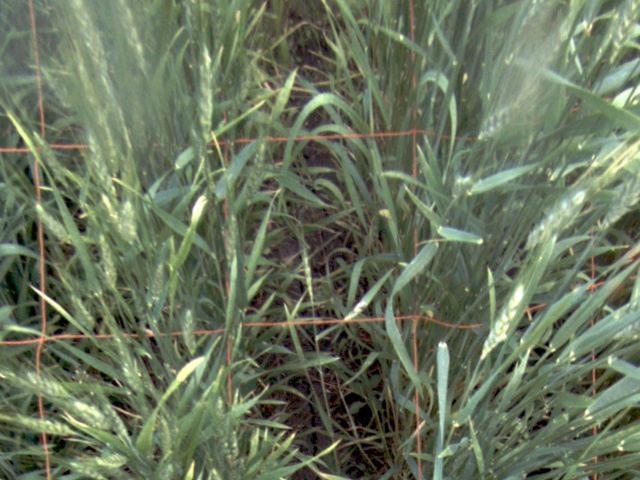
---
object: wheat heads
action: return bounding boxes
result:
[34,133,65,186]
[117,347,144,394]
[101,455,127,465]
[69,462,109,480]
[116,0,147,63]
[478,90,535,136]
[37,204,68,241]
[247,148,270,198]
[69,297,95,327]
[228,216,242,256]
[96,235,119,289]
[217,429,234,466]
[151,265,165,303]
[181,310,199,354]
[605,177,640,229]
[606,0,640,60]
[18,413,68,437]
[526,192,581,244]
[232,432,240,459]
[27,373,71,399]
[197,47,216,144]
[85,133,115,196]
[92,101,119,166]
[214,398,226,420]
[72,0,114,78]
[78,403,107,428]
[119,202,138,242]
[482,285,528,355]
[523,28,573,84]
[40,71,69,110]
